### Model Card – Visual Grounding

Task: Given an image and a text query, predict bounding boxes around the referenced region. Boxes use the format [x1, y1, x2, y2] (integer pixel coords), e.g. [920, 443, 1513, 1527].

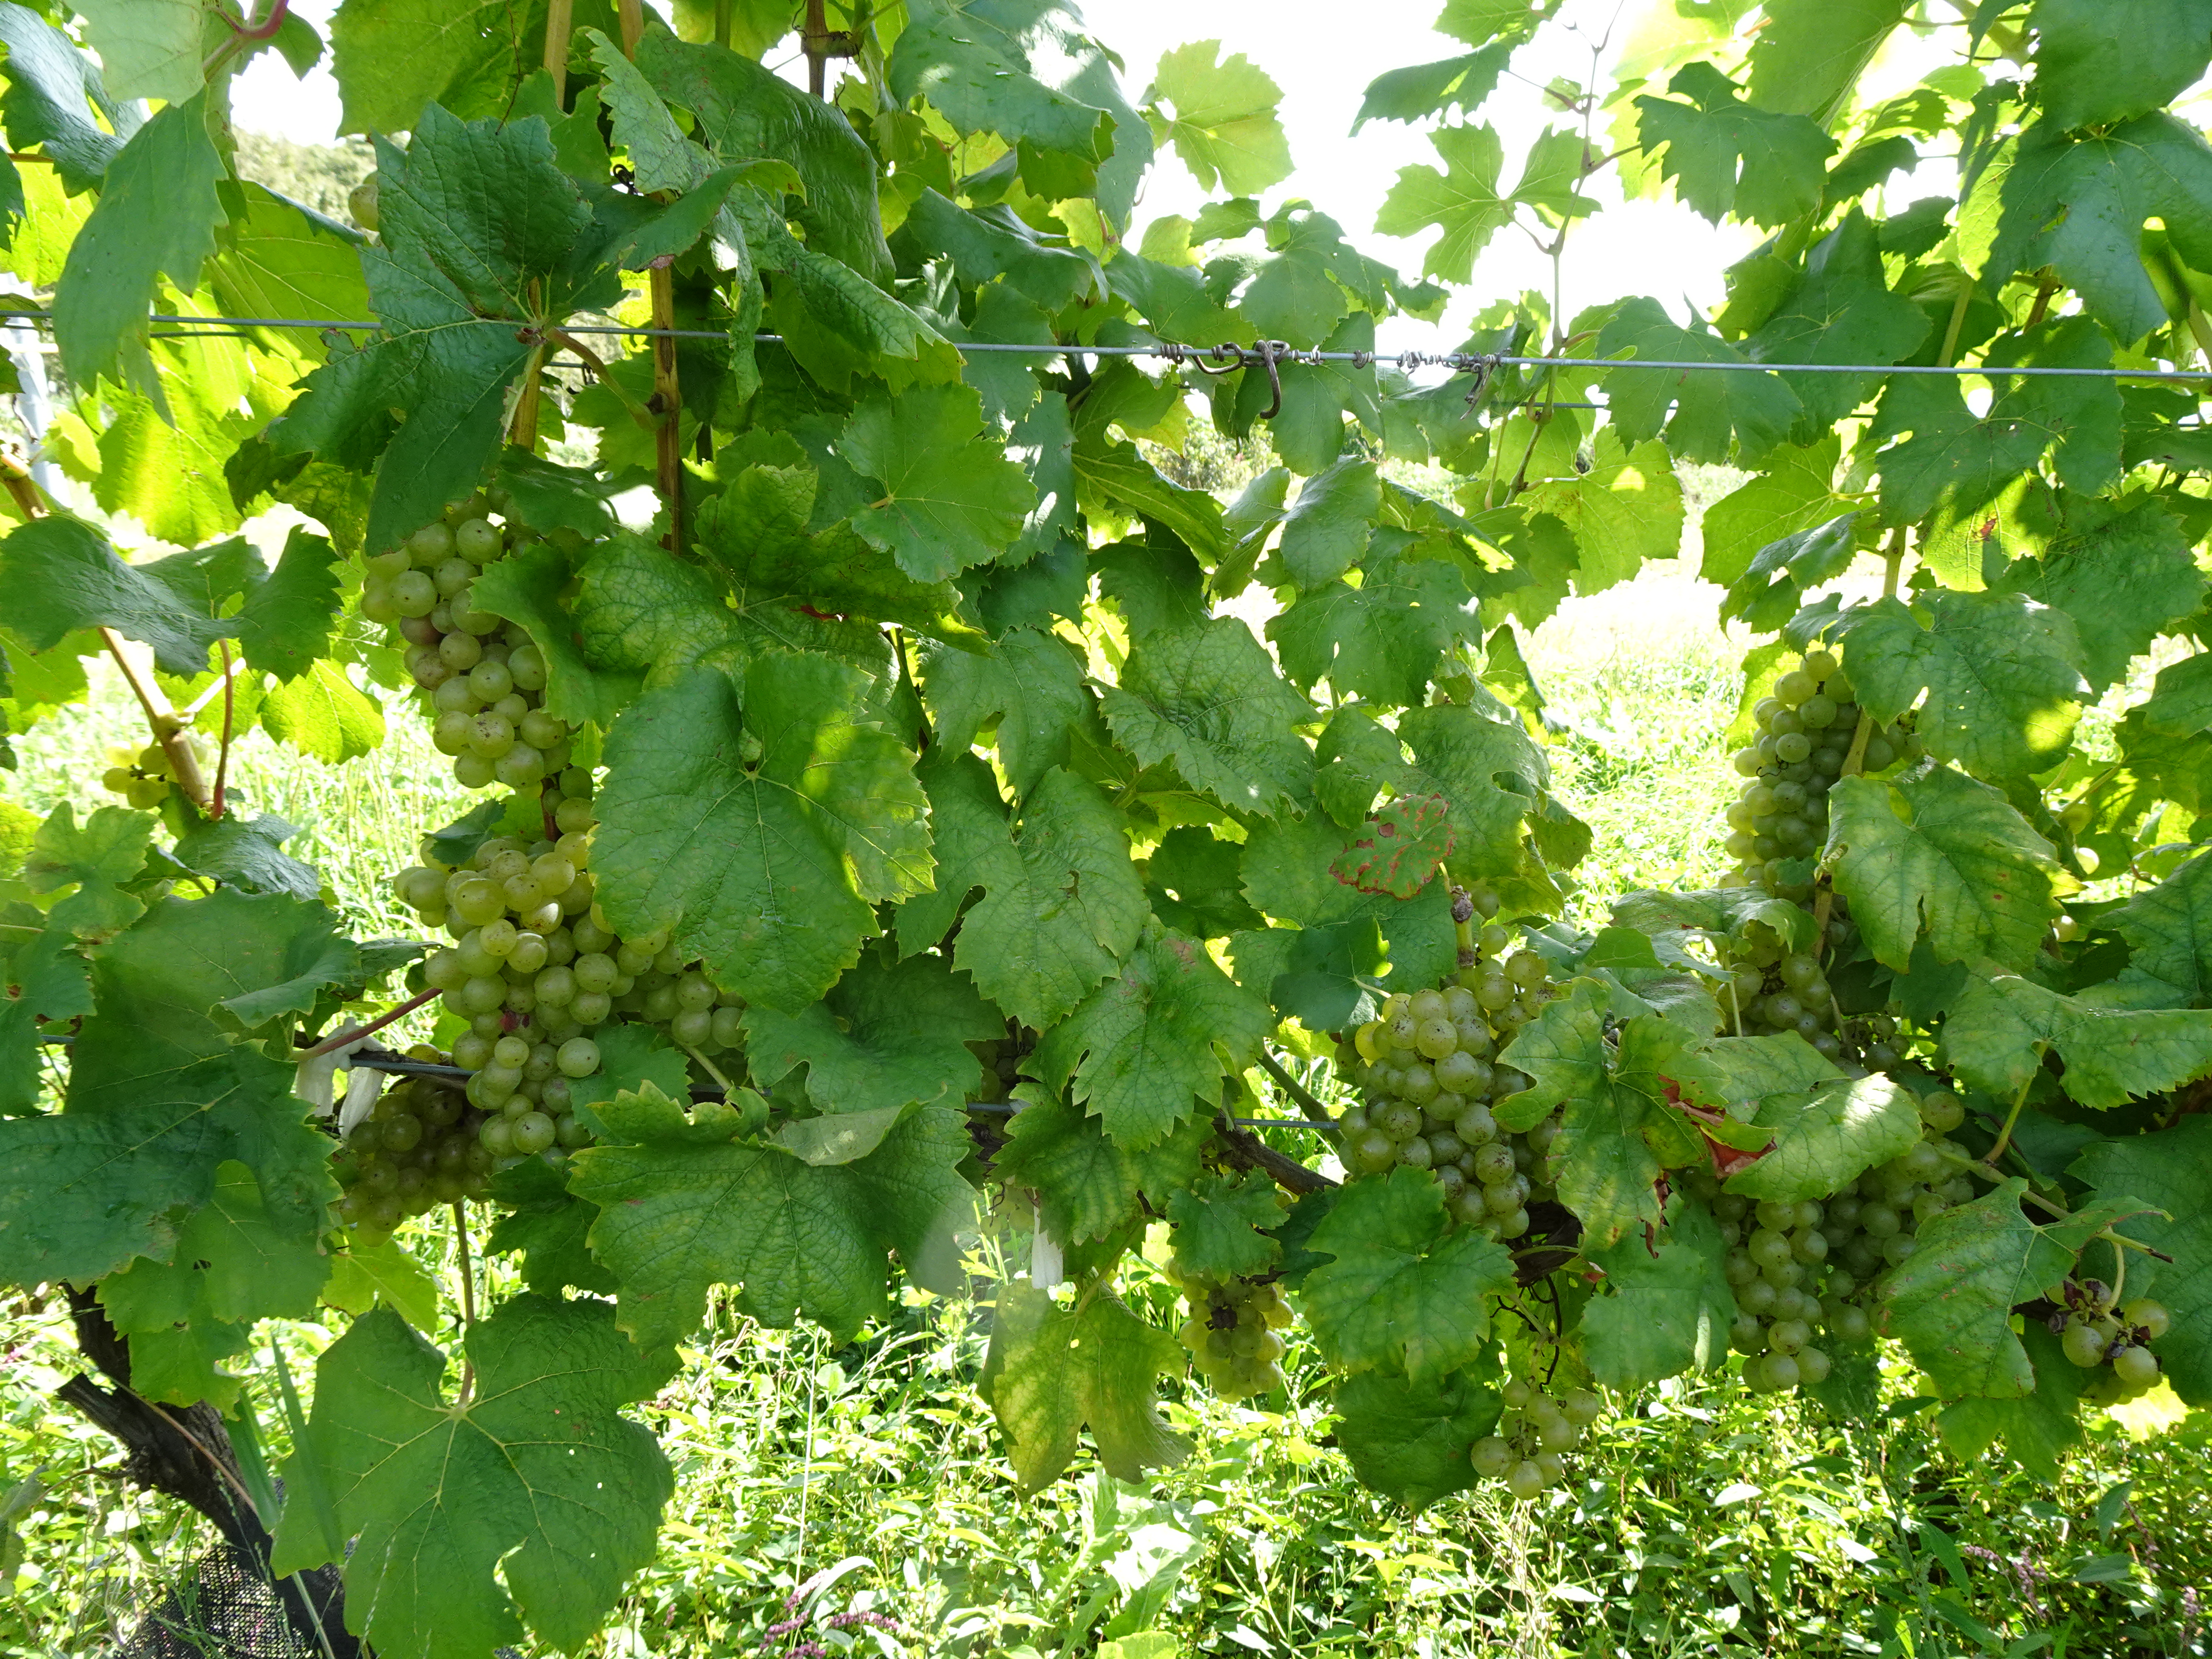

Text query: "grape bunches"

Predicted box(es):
[1715, 920, 1849, 1067]
[634, 968, 749, 1056]
[963, 1019, 1033, 1142]
[1337, 987, 1530, 1243]
[978, 1171, 1043, 1241]
[396, 768, 668, 1155]
[2047, 1276, 2170, 1408]
[1162, 1225, 1295, 1403]
[1274, 1192, 1296, 1209]
[1735, 1178, 1833, 1392]
[105, 716, 209, 811]
[363, 490, 594, 813]
[326, 1042, 497, 1248]
[1813, 1086, 1974, 1347]
[1715, 651, 1907, 908]
[1450, 887, 1595, 1215]
[1455, 1378, 1598, 1499]
[1833, 1011, 1925, 1081]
